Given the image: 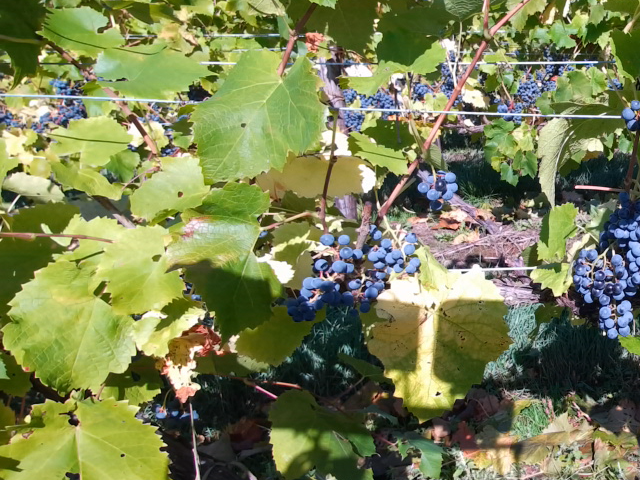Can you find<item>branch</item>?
Segmentation results:
<instances>
[{
  "label": "branch",
  "instance_id": "obj_1",
  "mask_svg": "<svg viewBox=\"0 0 640 480\" xmlns=\"http://www.w3.org/2000/svg\"><path fill=\"white\" fill-rule=\"evenodd\" d=\"M526 1H528V0H522L518 4L517 7L505 12L492 25H490L488 27V29L484 32L482 40L478 43L479 49H478L474 59L469 64V66H468L467 70L465 71V73L463 74V76L456 82V86L454 87L453 91L451 92V94H450V96L448 98V101L445 103V106L443 107V110H451L452 109V106L454 105L458 94L463 89V84L468 80V77L470 76V73H471L474 65L478 61L480 55L482 53H484L486 46L489 44L490 36L492 35V33L498 27H500L507 19L514 17V14L519 11L520 7Z\"/></svg>",
  "mask_w": 640,
  "mask_h": 480
},
{
  "label": "branch",
  "instance_id": "obj_2",
  "mask_svg": "<svg viewBox=\"0 0 640 480\" xmlns=\"http://www.w3.org/2000/svg\"><path fill=\"white\" fill-rule=\"evenodd\" d=\"M315 8H316V5L314 3H310L306 7V9L304 10L303 16L301 17L300 21L294 27V30H293L292 34L290 35V38L288 39V41L286 43L285 50L283 51L281 57L279 58L277 70L275 71V74L277 76H280L284 72L285 63H286L287 59L289 58V55L292 52L293 45H294L295 41L297 40V37L301 33V29L303 28V26L309 20L311 12Z\"/></svg>",
  "mask_w": 640,
  "mask_h": 480
},
{
  "label": "branch",
  "instance_id": "obj_3",
  "mask_svg": "<svg viewBox=\"0 0 640 480\" xmlns=\"http://www.w3.org/2000/svg\"><path fill=\"white\" fill-rule=\"evenodd\" d=\"M445 121H446V115H439L438 120L433 124L432 128L428 132L427 137L421 144L416 156L410 162V165L408 166V170L410 172H413L416 169L417 165L420 163V161L423 159L424 154L428 149L429 145L432 143L435 134L437 133L439 128L445 123Z\"/></svg>",
  "mask_w": 640,
  "mask_h": 480
},
{
  "label": "branch",
  "instance_id": "obj_4",
  "mask_svg": "<svg viewBox=\"0 0 640 480\" xmlns=\"http://www.w3.org/2000/svg\"><path fill=\"white\" fill-rule=\"evenodd\" d=\"M408 180H409V176L407 174H404L401 177V179L392 188V191H391L389 197L384 201V204L375 213L374 224L376 226H379L381 224L382 216L387 212V210L390 208L391 204L396 200L399 191L404 186V184H406L408 182Z\"/></svg>",
  "mask_w": 640,
  "mask_h": 480
}]
</instances>
